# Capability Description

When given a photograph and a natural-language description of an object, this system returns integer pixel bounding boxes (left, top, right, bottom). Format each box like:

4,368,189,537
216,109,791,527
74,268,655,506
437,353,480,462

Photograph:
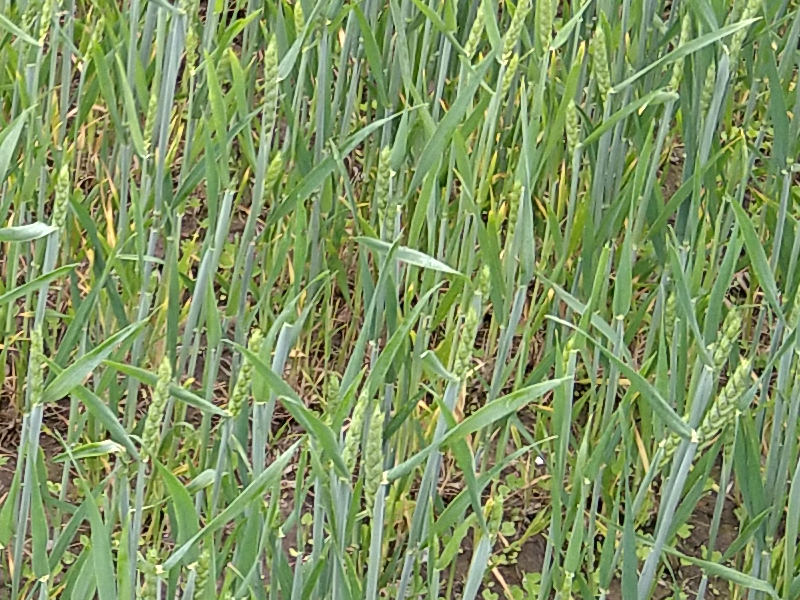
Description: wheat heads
477,264,493,305
659,414,691,471
566,96,581,152
365,403,385,496
662,292,677,339
729,0,764,59
592,26,612,101
538,0,557,49
188,25,199,76
504,0,530,53
146,550,157,600
374,144,392,225
24,0,40,27
51,166,72,230
717,305,737,348
38,0,55,45
86,18,104,60
293,0,306,39
671,16,693,90
715,310,740,365
144,96,156,152
698,366,749,446
700,59,718,111
230,332,263,414
499,53,520,90
143,356,172,455
510,180,522,235
261,33,280,138
453,309,477,376
465,0,488,58
341,396,366,473
386,204,398,239
261,156,283,196
490,492,501,543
